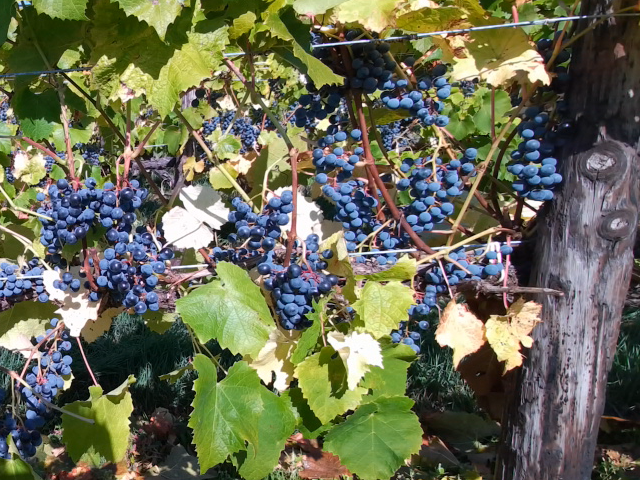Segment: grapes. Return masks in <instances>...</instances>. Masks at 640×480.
<instances>
[{
	"label": "grapes",
	"instance_id": "83cd7487",
	"mask_svg": "<svg viewBox=\"0 0 640 480\" xmlns=\"http://www.w3.org/2000/svg\"><path fill=\"white\" fill-rule=\"evenodd\" d=\"M18 394L27 401L26 405L30 407L25 413L24 420L25 428L28 431L24 428L18 429L17 419L12 417L10 413L5 415L4 426L11 433V437L14 439L13 445L19 454L23 458H34L38 452L37 446L42 444V435L35 428H42L45 425L46 419L39 413H45L47 405L33 396L32 392L23 385L18 387Z\"/></svg>",
	"mask_w": 640,
	"mask_h": 480
},
{
	"label": "grapes",
	"instance_id": "e5b3c951",
	"mask_svg": "<svg viewBox=\"0 0 640 480\" xmlns=\"http://www.w3.org/2000/svg\"><path fill=\"white\" fill-rule=\"evenodd\" d=\"M346 94L345 88L343 86L332 85H324L320 87V98L326 99V104L324 105L320 101L313 102V97L307 94H301L298 98V103L301 107H307L311 105V108L307 111L304 108H299L294 111V116L296 120L294 121V125L297 128H303L307 123V117L315 118L318 121L326 120L327 113H334L336 108L340 107L341 97H344Z\"/></svg>",
	"mask_w": 640,
	"mask_h": 480
},
{
	"label": "grapes",
	"instance_id": "54f908b8",
	"mask_svg": "<svg viewBox=\"0 0 640 480\" xmlns=\"http://www.w3.org/2000/svg\"><path fill=\"white\" fill-rule=\"evenodd\" d=\"M61 337L65 340H62L58 343V349H56L52 356L44 351L40 357V364L42 367H46L50 364V360L52 359L53 364L52 367L55 370L59 369V372L63 375H70L72 373V365L73 357L69 353H65L62 355L61 351H71L73 349L72 343L68 341L70 338V333L66 330L61 332Z\"/></svg>",
	"mask_w": 640,
	"mask_h": 480
},
{
	"label": "grapes",
	"instance_id": "dcf779d0",
	"mask_svg": "<svg viewBox=\"0 0 640 480\" xmlns=\"http://www.w3.org/2000/svg\"><path fill=\"white\" fill-rule=\"evenodd\" d=\"M314 56L320 60L336 75L346 74V65L339 47H320L314 50Z\"/></svg>",
	"mask_w": 640,
	"mask_h": 480
},
{
	"label": "grapes",
	"instance_id": "84f90ec7",
	"mask_svg": "<svg viewBox=\"0 0 640 480\" xmlns=\"http://www.w3.org/2000/svg\"><path fill=\"white\" fill-rule=\"evenodd\" d=\"M351 51L360 53V56L351 62V67L358 72L356 78L350 80L352 89L364 88L367 93L373 94L377 91H384L381 94V102L391 111L402 108L409 111L411 116L419 119L421 126L446 127L450 123V117L445 114H430L426 108V101L423 99L420 90L438 89L436 96L439 99H449L452 95V86L444 76L447 73V66L444 63L436 64L431 73L418 78V88L413 92H404L402 99L394 96L389 90L404 89L408 86L407 81L397 79L392 80L394 64L389 61L387 52L391 51L389 43L376 44H352Z\"/></svg>",
	"mask_w": 640,
	"mask_h": 480
},
{
	"label": "grapes",
	"instance_id": "23402543",
	"mask_svg": "<svg viewBox=\"0 0 640 480\" xmlns=\"http://www.w3.org/2000/svg\"><path fill=\"white\" fill-rule=\"evenodd\" d=\"M35 291L38 294V301L42 304H46L48 302V295L46 293H44V288H43V280L42 279H35Z\"/></svg>",
	"mask_w": 640,
	"mask_h": 480
},
{
	"label": "grapes",
	"instance_id": "4a4d1313",
	"mask_svg": "<svg viewBox=\"0 0 640 480\" xmlns=\"http://www.w3.org/2000/svg\"><path fill=\"white\" fill-rule=\"evenodd\" d=\"M373 259H376L377 263L380 266H386L387 262H390L392 265H395L398 262V253L396 254H385V255H377L371 256Z\"/></svg>",
	"mask_w": 640,
	"mask_h": 480
},
{
	"label": "grapes",
	"instance_id": "802abce8",
	"mask_svg": "<svg viewBox=\"0 0 640 480\" xmlns=\"http://www.w3.org/2000/svg\"><path fill=\"white\" fill-rule=\"evenodd\" d=\"M378 239L380 241H383V246L385 249H393L397 246H401L402 243H406L411 239V237L404 229H401V231H399V236L391 237L390 229L384 227V229L378 233Z\"/></svg>",
	"mask_w": 640,
	"mask_h": 480
},
{
	"label": "grapes",
	"instance_id": "b958b902",
	"mask_svg": "<svg viewBox=\"0 0 640 480\" xmlns=\"http://www.w3.org/2000/svg\"><path fill=\"white\" fill-rule=\"evenodd\" d=\"M231 205L236 210H231L227 214V219L235 223L237 233H230L226 236L229 243H234L238 239H248L249 248L241 247L238 251L235 248H225L215 246L209 256L211 261H231L244 262L250 258H257L260 249L265 252L264 256L256 263L260 275H269L263 281V288L266 291L272 290V296L276 299V313L281 316L280 326L284 330L303 331L305 327H311L313 322L308 320L306 315L313 313V298L319 297L321 292H329L332 287L339 283V277L335 274L324 275L320 270L328 267L325 259H332L334 251L324 249L322 257L317 253L319 250L320 236L317 233H309L305 239L306 263L301 266L296 264L301 257L300 252H292L289 266L284 268L282 264H274L276 252L274 251L276 241L282 235L279 226H286L290 223L288 215L295 206L291 201V191L283 190L281 197L272 196L267 200L264 210L268 213L258 215L251 207L244 202L241 196H236ZM310 270L313 276L307 278L303 276V271Z\"/></svg>",
	"mask_w": 640,
	"mask_h": 480
},
{
	"label": "grapes",
	"instance_id": "0513c4c2",
	"mask_svg": "<svg viewBox=\"0 0 640 480\" xmlns=\"http://www.w3.org/2000/svg\"><path fill=\"white\" fill-rule=\"evenodd\" d=\"M329 126L326 129V134L323 138L317 140V146L313 150L312 165L317 168L314 181L323 185L328 180L329 171H334L336 167H341L342 171L337 174L336 185H324L321 192L326 197H332V201L336 202L337 213L334 215L335 222H343L342 228L345 231L343 233V240L346 243V249L348 251H355L357 249V243L363 242L368 234L361 228L363 223H369L368 229L372 232H376L382 227V223L377 220V213L373 211L379 201L373 196H368L366 192L362 190L365 187V183L362 180H351L342 182L345 179L353 177L355 170V164L360 163V156L364 154L362 147H356L353 150L348 160L339 158L344 154L342 147H334L331 150V154L325 155V151L322 149L326 146H331L336 142H344L348 140V133L346 131H338V125L341 128H345L349 125V119L346 116L332 115L329 118Z\"/></svg>",
	"mask_w": 640,
	"mask_h": 480
},
{
	"label": "grapes",
	"instance_id": "f8a65327",
	"mask_svg": "<svg viewBox=\"0 0 640 480\" xmlns=\"http://www.w3.org/2000/svg\"><path fill=\"white\" fill-rule=\"evenodd\" d=\"M477 157V150L474 147H468L463 152V158L452 159L446 165V171L441 167H435L434 172L437 182H428L427 180L433 173L431 166L420 167L424 161L431 160L430 155H427L424 159L419 156L415 160L412 157H406L402 160L400 169L404 173H408L413 165L418 167L412 169L408 179L403 180L401 178L395 184V188L399 192H404L409 187L412 188L410 196L416 199L412 204L403 206L402 211L405 221L412 226L417 234H421L424 230L431 231L434 228V224H443L445 218L455 212V204L451 203L448 197L462 196L464 194V183L459 181L457 169L460 168V173L464 176L475 178L477 171L473 161ZM431 193H436V196L441 200L440 207H429L436 203V198L431 196Z\"/></svg>",
	"mask_w": 640,
	"mask_h": 480
},
{
	"label": "grapes",
	"instance_id": "9fbda902",
	"mask_svg": "<svg viewBox=\"0 0 640 480\" xmlns=\"http://www.w3.org/2000/svg\"><path fill=\"white\" fill-rule=\"evenodd\" d=\"M421 339V333L419 331H411L409 335L404 339V343L406 345H410V348L415 353L421 352V347L418 344H415V341H419Z\"/></svg>",
	"mask_w": 640,
	"mask_h": 480
},
{
	"label": "grapes",
	"instance_id": "91a60905",
	"mask_svg": "<svg viewBox=\"0 0 640 480\" xmlns=\"http://www.w3.org/2000/svg\"><path fill=\"white\" fill-rule=\"evenodd\" d=\"M0 276H7L8 280L6 283L3 281L0 282V297L3 295L5 297H9L14 295H21L24 290H30L32 288V282L28 280H16L14 272L19 270L17 265H10L8 263L2 262L0 264Z\"/></svg>",
	"mask_w": 640,
	"mask_h": 480
},
{
	"label": "grapes",
	"instance_id": "012428b0",
	"mask_svg": "<svg viewBox=\"0 0 640 480\" xmlns=\"http://www.w3.org/2000/svg\"><path fill=\"white\" fill-rule=\"evenodd\" d=\"M69 288L73 293H78L81 290V280L77 277H73L70 272H63L61 279H56L52 282V287L56 290L66 291Z\"/></svg>",
	"mask_w": 640,
	"mask_h": 480
},
{
	"label": "grapes",
	"instance_id": "01657485",
	"mask_svg": "<svg viewBox=\"0 0 640 480\" xmlns=\"http://www.w3.org/2000/svg\"><path fill=\"white\" fill-rule=\"evenodd\" d=\"M98 181L93 176L84 179V186L75 190L66 179H59L56 185L48 188L49 203L37 209V221L44 226L40 229L39 243L47 246L44 259L47 263L55 264V271H62L68 265L60 253H55L65 243L76 245L88 234L97 214V221L106 231V239L116 242L114 249L103 251V259L97 263L100 274L96 282L102 287L118 290L121 303L125 308H135L137 315L161 310L160 294L153 292L159 283V276L165 272V262L175 258V251L170 247H162L159 252L153 242V236L142 225L135 229V239L130 241L133 224L138 221L135 209L145 204L149 194L146 187L132 179L129 186L118 193L119 205L114 183L108 181L104 189H95ZM133 253L132 258L139 264L130 266L126 258L118 259L119 255Z\"/></svg>",
	"mask_w": 640,
	"mask_h": 480
},
{
	"label": "grapes",
	"instance_id": "34c12dc5",
	"mask_svg": "<svg viewBox=\"0 0 640 480\" xmlns=\"http://www.w3.org/2000/svg\"><path fill=\"white\" fill-rule=\"evenodd\" d=\"M38 263L39 260L35 256H32L28 261V269H23L21 274H42L45 270L42 266H37Z\"/></svg>",
	"mask_w": 640,
	"mask_h": 480
},
{
	"label": "grapes",
	"instance_id": "ef6de9ee",
	"mask_svg": "<svg viewBox=\"0 0 640 480\" xmlns=\"http://www.w3.org/2000/svg\"><path fill=\"white\" fill-rule=\"evenodd\" d=\"M424 280L428 284L424 287L422 303L418 305L411 304L408 308V314L415 315V312L421 316H428L432 312V308L437 305V293H445L448 291V287L444 284L445 278L443 277V270L441 267L434 266L432 271H426L424 273Z\"/></svg>",
	"mask_w": 640,
	"mask_h": 480
},
{
	"label": "grapes",
	"instance_id": "5460f4e3",
	"mask_svg": "<svg viewBox=\"0 0 640 480\" xmlns=\"http://www.w3.org/2000/svg\"><path fill=\"white\" fill-rule=\"evenodd\" d=\"M544 111L542 104L530 106L526 109V116L533 121H523L518 126V135L524 140L518 145L517 150L510 153L512 160L524 158L528 162H541V167L525 165L515 162L508 166V171L518 180L512 183V188L519 192L521 197L536 202H551L554 199V190L557 184L563 182V176L557 173L560 160L551 156L555 151L552 142L540 141V137L546 134V124L549 121L547 114H539Z\"/></svg>",
	"mask_w": 640,
	"mask_h": 480
},
{
	"label": "grapes",
	"instance_id": "1ff8f66d",
	"mask_svg": "<svg viewBox=\"0 0 640 480\" xmlns=\"http://www.w3.org/2000/svg\"><path fill=\"white\" fill-rule=\"evenodd\" d=\"M38 374L39 367L37 365H33L31 367V372H27L25 374L26 382L30 387H32V391L34 393H40L41 397L46 402L52 403L54 401L53 397L58 394L57 389H63L65 387V381L59 375H54L51 369H48L44 376V382L38 384Z\"/></svg>",
	"mask_w": 640,
	"mask_h": 480
},
{
	"label": "grapes",
	"instance_id": "62ce99fe",
	"mask_svg": "<svg viewBox=\"0 0 640 480\" xmlns=\"http://www.w3.org/2000/svg\"><path fill=\"white\" fill-rule=\"evenodd\" d=\"M405 323L400 322L399 327L396 330H392L390 333V337L393 343H399L402 341V336L404 335Z\"/></svg>",
	"mask_w": 640,
	"mask_h": 480
},
{
	"label": "grapes",
	"instance_id": "2adb6a1f",
	"mask_svg": "<svg viewBox=\"0 0 640 480\" xmlns=\"http://www.w3.org/2000/svg\"><path fill=\"white\" fill-rule=\"evenodd\" d=\"M466 249L462 247L448 254L450 259L456 261L459 265H463V268L466 269L470 274H467L466 271L457 269L454 263H446L444 265V272L446 273V278L448 279L449 286H457L459 284V280H464L465 282H469L472 280L482 281L487 277H495L498 276L504 269V264L502 262H497L489 265H470L466 261Z\"/></svg>",
	"mask_w": 640,
	"mask_h": 480
}]
</instances>
